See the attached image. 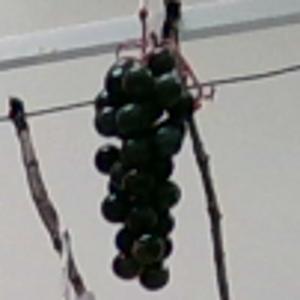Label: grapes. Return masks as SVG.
Here are the masks:
<instances>
[{"label": "grapes", "mask_w": 300, "mask_h": 300, "mask_svg": "<svg viewBox=\"0 0 300 300\" xmlns=\"http://www.w3.org/2000/svg\"><path fill=\"white\" fill-rule=\"evenodd\" d=\"M180 63L178 50L167 44L153 47L142 60L119 57L93 98L97 134L126 140L124 148L104 143L94 153L96 170L109 177L103 217L124 224L114 238L120 253L112 269L124 281L139 275L149 291L170 279L163 264L173 250L168 235L175 220L169 209L178 204L181 191L168 179L175 171L173 156L187 135L184 123L193 119L198 106L195 93L184 89Z\"/></svg>", "instance_id": "01657485"}]
</instances>
